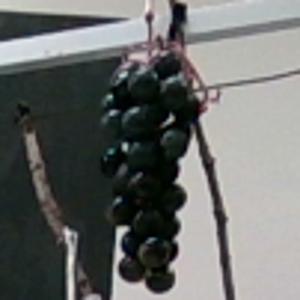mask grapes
<instances>
[{
    "label": "grapes",
    "instance_id": "1",
    "mask_svg": "<svg viewBox=\"0 0 300 300\" xmlns=\"http://www.w3.org/2000/svg\"><path fill=\"white\" fill-rule=\"evenodd\" d=\"M182 57L163 49L146 64L133 60L118 67L110 83L112 93L99 101L107 116L99 123L101 134L129 142L133 152L122 157L114 149L99 157V172L125 195L114 197L104 211L106 222L129 226L120 239L125 254L117 272L128 284L144 280L148 290L164 294L176 282L170 264L177 257L173 236L181 229L175 213L187 199L176 184L178 161L188 150L191 123L201 115L202 103L184 76Z\"/></svg>",
    "mask_w": 300,
    "mask_h": 300
}]
</instances>
